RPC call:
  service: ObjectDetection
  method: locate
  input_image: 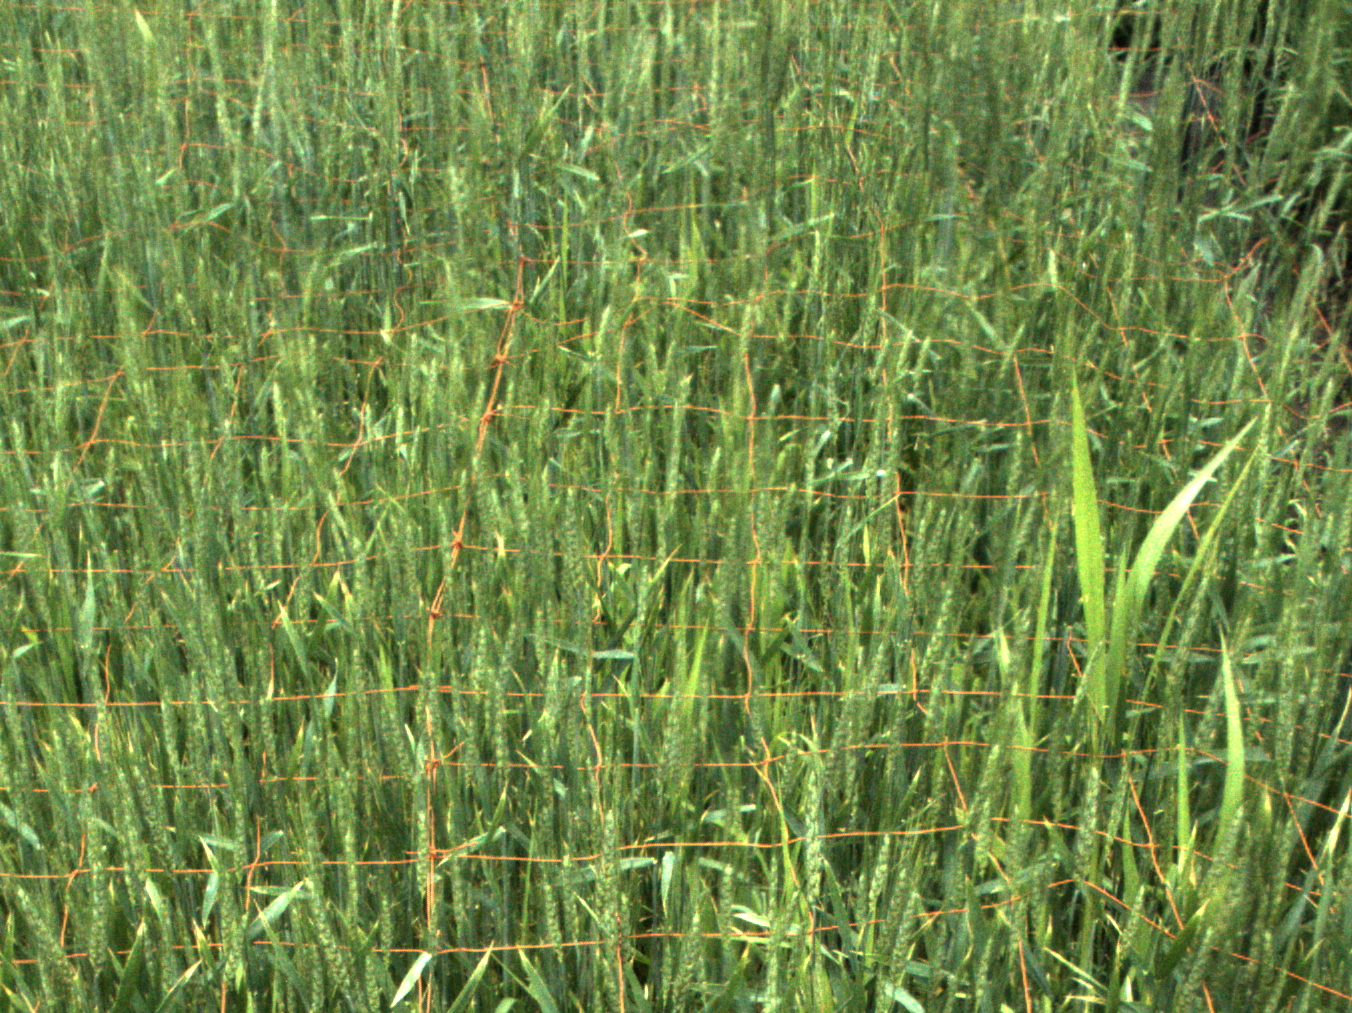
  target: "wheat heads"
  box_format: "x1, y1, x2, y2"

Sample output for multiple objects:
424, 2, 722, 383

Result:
406, 589, 421, 661
492, 700, 511, 776
997, 604, 1033, 710
961, 743, 1000, 831
1253, 607, 1289, 687
264, 40, 281, 122
363, 952, 386, 1013
729, 786, 743, 836
1210, 938, 1232, 987
878, 428, 900, 554
259, 649, 274, 686
447, 410, 459, 463
153, 63, 173, 116
812, 951, 826, 1010
302, 949, 312, 994
333, 1000, 344, 1013
717, 863, 735, 950
33, 402, 48, 451
139, 473, 179, 556
249, 539, 268, 599
1291, 979, 1313, 1013
860, 683, 880, 748
831, 142, 841, 179
304, 389, 321, 428
737, 506, 753, 556
779, 731, 796, 794
132, 550, 149, 608
1298, 351, 1311, 399
220, 868, 234, 959
1294, 29, 1337, 130
1321, 809, 1352, 942
627, 56, 652, 143
1157, 6, 1171, 42
471, 625, 488, 701
1115, 286, 1134, 318
732, 376, 743, 414
1336, 471, 1352, 557
714, 92, 731, 152
1223, 356, 1247, 417
504, 3, 518, 49
1071, 768, 1100, 888
1009, 899, 1028, 968
1209, 6, 1224, 41
1291, 675, 1323, 784
51, 730, 76, 795
51, 451, 61, 494
1118, 883, 1144, 963
124, 489, 138, 532
819, 256, 831, 304
96, 166, 106, 225
602, 718, 615, 782
494, 622, 515, 704
198, 577, 215, 642
1046, 486, 1059, 520
0, 432, 18, 489
883, 144, 910, 220
413, 671, 428, 732
302, 879, 352, 998
765, 8, 797, 101
714, 556, 729, 626
946, 512, 969, 588
559, 854, 581, 939
503, 381, 518, 425
834, 605, 850, 667
1234, 525, 1249, 562
824, 363, 842, 445
1014, 823, 1029, 872
765, 889, 801, 960
170, 406, 183, 451
721, 789, 737, 834
1244, 930, 1277, 1013
345, 725, 359, 796
1193, 647, 1241, 751
1046, 716, 1066, 816
883, 702, 905, 783
855, 874, 868, 934
291, 907, 303, 953
272, 379, 285, 428
53, 381, 67, 436
704, 501, 722, 534
186, 709, 210, 784
1072, 225, 1086, 271
159, 683, 182, 774
222, 914, 247, 984
804, 768, 824, 898
10, 418, 30, 475
296, 535, 312, 630
657, 35, 676, 106
594, 305, 611, 355
324, 490, 349, 535
661, 339, 676, 394
1195, 805, 1243, 901
1072, 639, 1103, 711
1116, 44, 1138, 118
407, 333, 420, 405
582, 664, 594, 724
121, 2, 150, 119
1004, 802, 1022, 873
925, 918, 946, 1013
603, 472, 623, 554
379, 899, 393, 969
1089, 347, 1109, 398
295, 421, 312, 464
617, 891, 633, 956
437, 3, 448, 48
849, 794, 858, 828
181, 931, 197, 966
59, 549, 77, 601
641, 72, 655, 136
113, 763, 149, 902
804, 437, 817, 505
1087, 99, 1103, 146
509, 112, 529, 155
942, 972, 958, 1013
869, 158, 879, 190
1234, 471, 1252, 533
671, 911, 703, 1010
871, 337, 890, 381
475, 468, 497, 534
787, 923, 808, 980
1138, 19, 1155, 60
464, 717, 479, 783
1267, 84, 1302, 144
622, 494, 643, 542
1199, 356, 1229, 410
531, 605, 548, 659
1316, 326, 1344, 385
311, 944, 325, 1013
422, 11, 438, 62
753, 130, 771, 202
584, 750, 602, 804
211, 662, 242, 752
195, 488, 209, 582
339, 28, 350, 58
1242, 686, 1268, 751
24, 552, 53, 631
1120, 229, 1136, 284
579, 205, 606, 255
1162, 371, 1184, 422
1200, 348, 1222, 389
615, 746, 627, 814
91, 662, 115, 761
205, 27, 228, 91
51, 272, 64, 319
441, 261, 459, 291
871, 54, 881, 89
566, 688, 583, 767
768, 533, 787, 608
755, 491, 771, 563
822, 694, 855, 779
366, 401, 373, 451
975, 796, 991, 870
1252, 484, 1284, 563
1024, 856, 1058, 956
409, 70, 422, 111
427, 670, 444, 741
178, 487, 197, 549
593, 991, 604, 1013
469, 381, 486, 443
244, 683, 258, 754
748, 686, 766, 753
55, 485, 67, 525
1122, 428, 1141, 464
1280, 322, 1299, 374
843, 720, 860, 802
914, 481, 926, 519
1122, 368, 1148, 424
651, 497, 668, 580
272, 962, 284, 1007
695, 520, 709, 573
448, 341, 460, 383
907, 519, 926, 612
402, 521, 415, 591
268, 493, 279, 529
1151, 364, 1174, 430
707, 446, 721, 500
258, 688, 282, 774
211, 630, 228, 682
697, 673, 711, 745
1273, 8, 1298, 69
302, 800, 325, 879
481, 685, 494, 736
1165, 107, 1180, 190
329, 522, 348, 557
103, 447, 115, 495
1188, 345, 1201, 392
1047, 390, 1060, 440
975, 937, 995, 1010
1270, 818, 1294, 922
895, 330, 913, 374
158, 934, 178, 993
1244, 920, 1265, 983
913, 335, 931, 391
558, 487, 585, 601
542, 694, 563, 740
104, 175, 121, 225
923, 507, 947, 570
345, 24, 358, 58
1322, 513, 1334, 544
1044, 247, 1061, 294
292, 84, 310, 148
864, 429, 881, 504
678, 234, 690, 275
1218, 437, 1231, 492
424, 359, 439, 414
1037, 52, 1049, 88
1232, 964, 1248, 1013
258, 445, 273, 488
317, 411, 325, 456
1179, 921, 1201, 974
394, 405, 405, 448
1010, 986, 1024, 1013
131, 764, 178, 884
738, 304, 755, 357
847, 13, 864, 93
763, 955, 781, 1013
673, 375, 692, 426
42, 60, 65, 149
245, 278, 258, 334
924, 650, 950, 735
1152, 552, 1175, 610
873, 979, 890, 1013
926, 1, 940, 36
724, 518, 738, 593
533, 399, 551, 449
1272, 658, 1297, 780
0, 726, 14, 792
444, 165, 467, 215
394, 59, 405, 113
297, 337, 308, 381
139, 376, 159, 430
804, 337, 817, 372
781, 301, 791, 324
427, 896, 441, 936
1330, 959, 1345, 1006
309, 735, 329, 788
775, 337, 794, 373
925, 767, 944, 834
450, 862, 466, 928
57, 160, 80, 220
919, 588, 955, 682
207, 291, 223, 358
888, 892, 922, 987
457, 467, 467, 515
38, 902, 57, 1001
768, 857, 779, 923
221, 354, 235, 391
20, 760, 43, 816
861, 295, 878, 353
175, 289, 203, 351
293, 385, 309, 419
819, 548, 832, 601
543, 16, 555, 66
143, 926, 156, 979
1180, 5, 1199, 40
214, 100, 228, 139
279, 67, 295, 115
654, 690, 685, 795
342, 825, 358, 912
340, 948, 360, 991
96, 543, 114, 603
603, 401, 622, 463
1157, 784, 1174, 877
796, 525, 809, 590
516, 14, 527, 55
537, 804, 556, 851
837, 505, 853, 590
14, 884, 80, 989
1213, 536, 1235, 588
724, 26, 740, 73
410, 424, 422, 463
1105, 762, 1131, 849
766, 494, 781, 549
245, 652, 260, 686
80, 49, 112, 122
1255, 402, 1275, 482
1143, 158, 1169, 214
1174, 924, 1214, 1013
1165, 573, 1211, 708
319, 340, 334, 382
387, 541, 401, 595
261, 509, 272, 566
1154, 279, 1169, 314
196, 254, 210, 323
231, 492, 245, 527
997, 322, 1026, 382
1121, 611, 1142, 676
602, 973, 632, 1013
1316, 375, 1335, 419
183, 418, 200, 491
368, 556, 388, 615
82, 812, 102, 865
187, 667, 204, 724
4, 688, 26, 747
299, 259, 327, 332
1002, 430, 1024, 505
323, 118, 339, 180
0, 533, 15, 633
327, 734, 338, 805
8, 499, 36, 554
804, 253, 822, 311
572, 17, 591, 60
826, 275, 850, 331
234, 799, 248, 882
957, 318, 973, 389
706, 67, 720, 140
388, 513, 401, 539
512, 548, 534, 594
1025, 210, 1041, 274
443, 65, 460, 126
194, 641, 214, 677
951, 419, 967, 463
544, 593, 557, 653
214, 420, 238, 525
531, 470, 555, 590
224, 287, 242, 338
1057, 82, 1082, 165
661, 944, 673, 998
38, 352, 44, 394
377, 111, 389, 170
0, 143, 20, 202
1266, 818, 1284, 874
44, 73, 72, 160
249, 72, 265, 131
594, 807, 615, 926
93, 18, 132, 111
1214, 68, 1241, 143
1323, 649, 1343, 710
806, 139, 831, 169
285, 976, 298, 1013
378, 586, 388, 630
632, 564, 651, 626
17, 88, 30, 165
128, 314, 140, 346
352, 647, 371, 726
662, 429, 681, 504
1156, 715, 1168, 769
279, 501, 289, 533
490, 51, 511, 121
223, 643, 243, 710
537, 744, 555, 812
1032, 994, 1049, 1013
42, 472, 57, 518
518, 44, 534, 108
10, 770, 22, 814
1063, 305, 1075, 360
1240, 3, 1261, 35
1053, 507, 1071, 593
87, 863, 108, 969
1028, 527, 1046, 602
307, 333, 319, 382
1076, 319, 1099, 375
0, 177, 16, 234
63, 894, 90, 950
1217, 837, 1254, 911
692, 954, 709, 996
863, 54, 876, 111
1315, 164, 1342, 234
448, 667, 462, 730
868, 832, 890, 913
541, 883, 566, 957
116, 600, 128, 646
738, 572, 750, 625
1009, 493, 1041, 564
415, 809, 434, 895
669, 711, 689, 788
27, 379, 56, 421
68, 974, 83, 1013
360, 145, 375, 179
349, 536, 371, 624
605, 882, 620, 963
122, 344, 142, 401
1261, 5, 1278, 44
619, 32, 641, 113
377, 690, 419, 792
948, 856, 965, 927
754, 302, 765, 329
1255, 969, 1288, 1013
643, 339, 662, 400
271, 526, 283, 571
338, 122, 352, 183
781, 483, 797, 528
344, 906, 360, 945
876, 866, 908, 961
71, 729, 93, 778
503, 460, 531, 538
434, 504, 456, 584
865, 641, 889, 694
